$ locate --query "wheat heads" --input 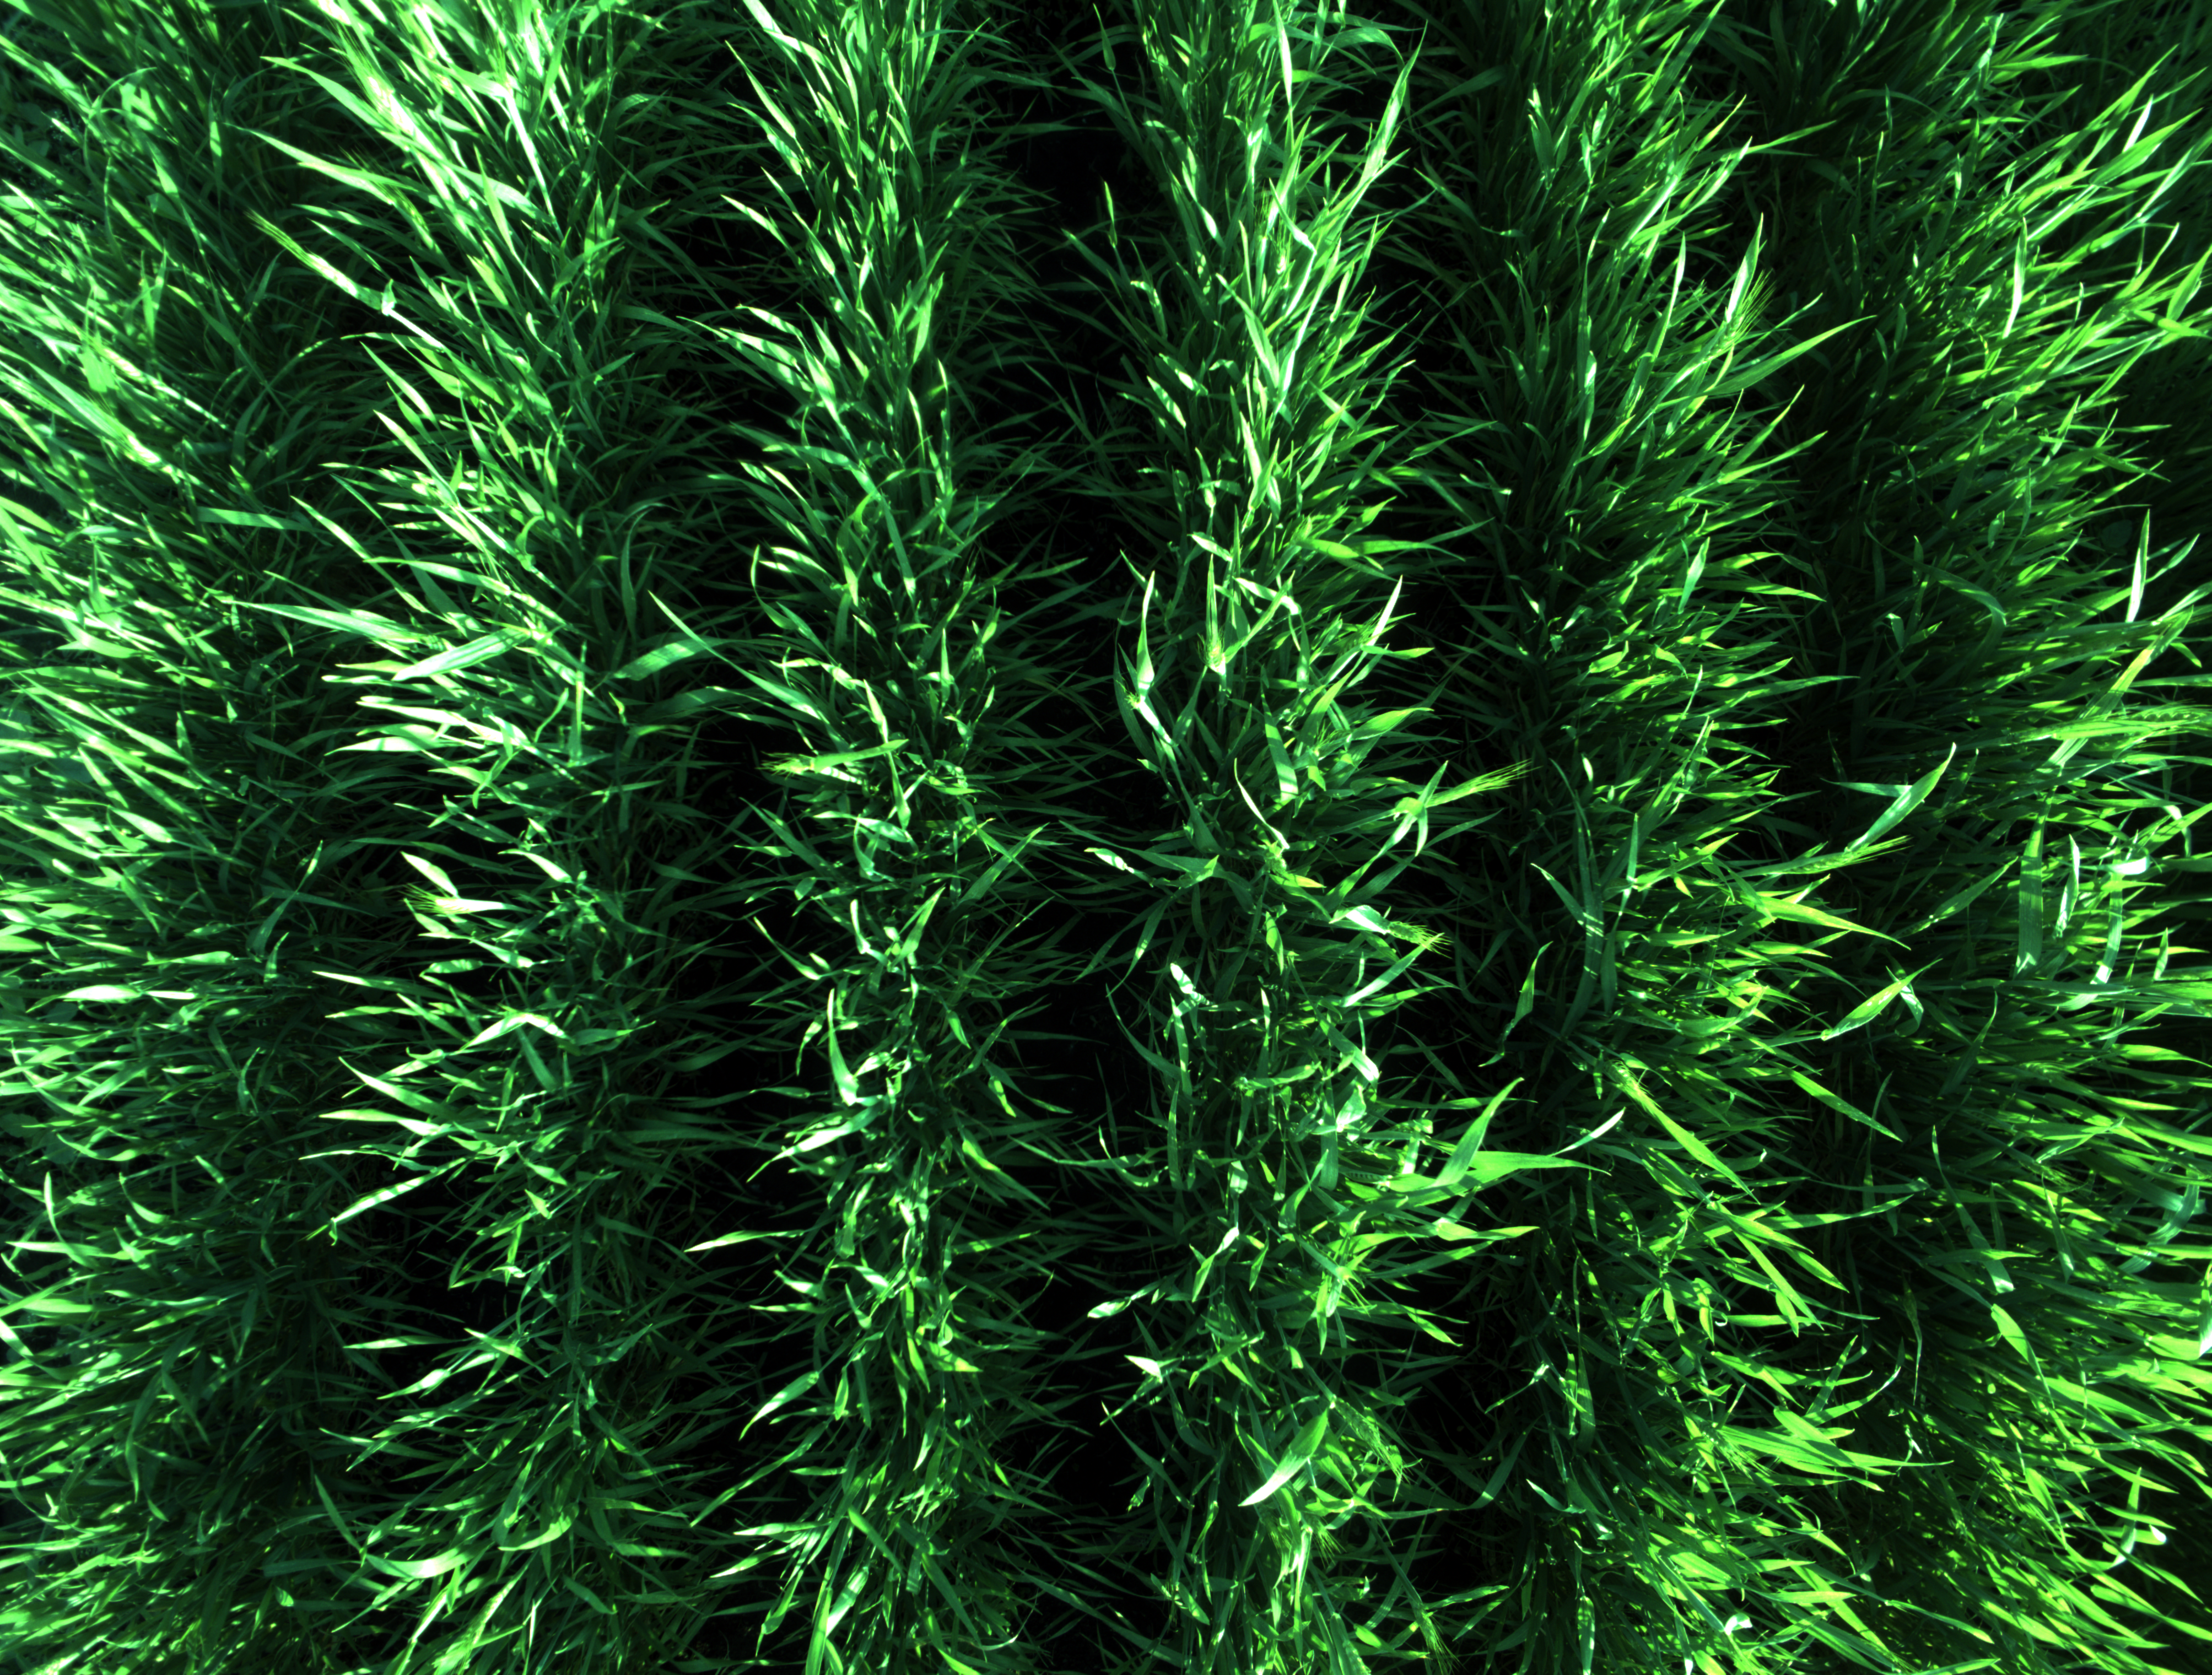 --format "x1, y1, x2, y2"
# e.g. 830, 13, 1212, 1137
1337, 624, 1377, 646
1430, 777, 1481, 805
2114, 701, 2205, 721
1386, 923, 1428, 945
1334, 1395, 1381, 1449
1417, 1600, 1445, 1651
1343, 1638, 1374, 1675
1707, 306, 1747, 351
1790, 848, 1865, 874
